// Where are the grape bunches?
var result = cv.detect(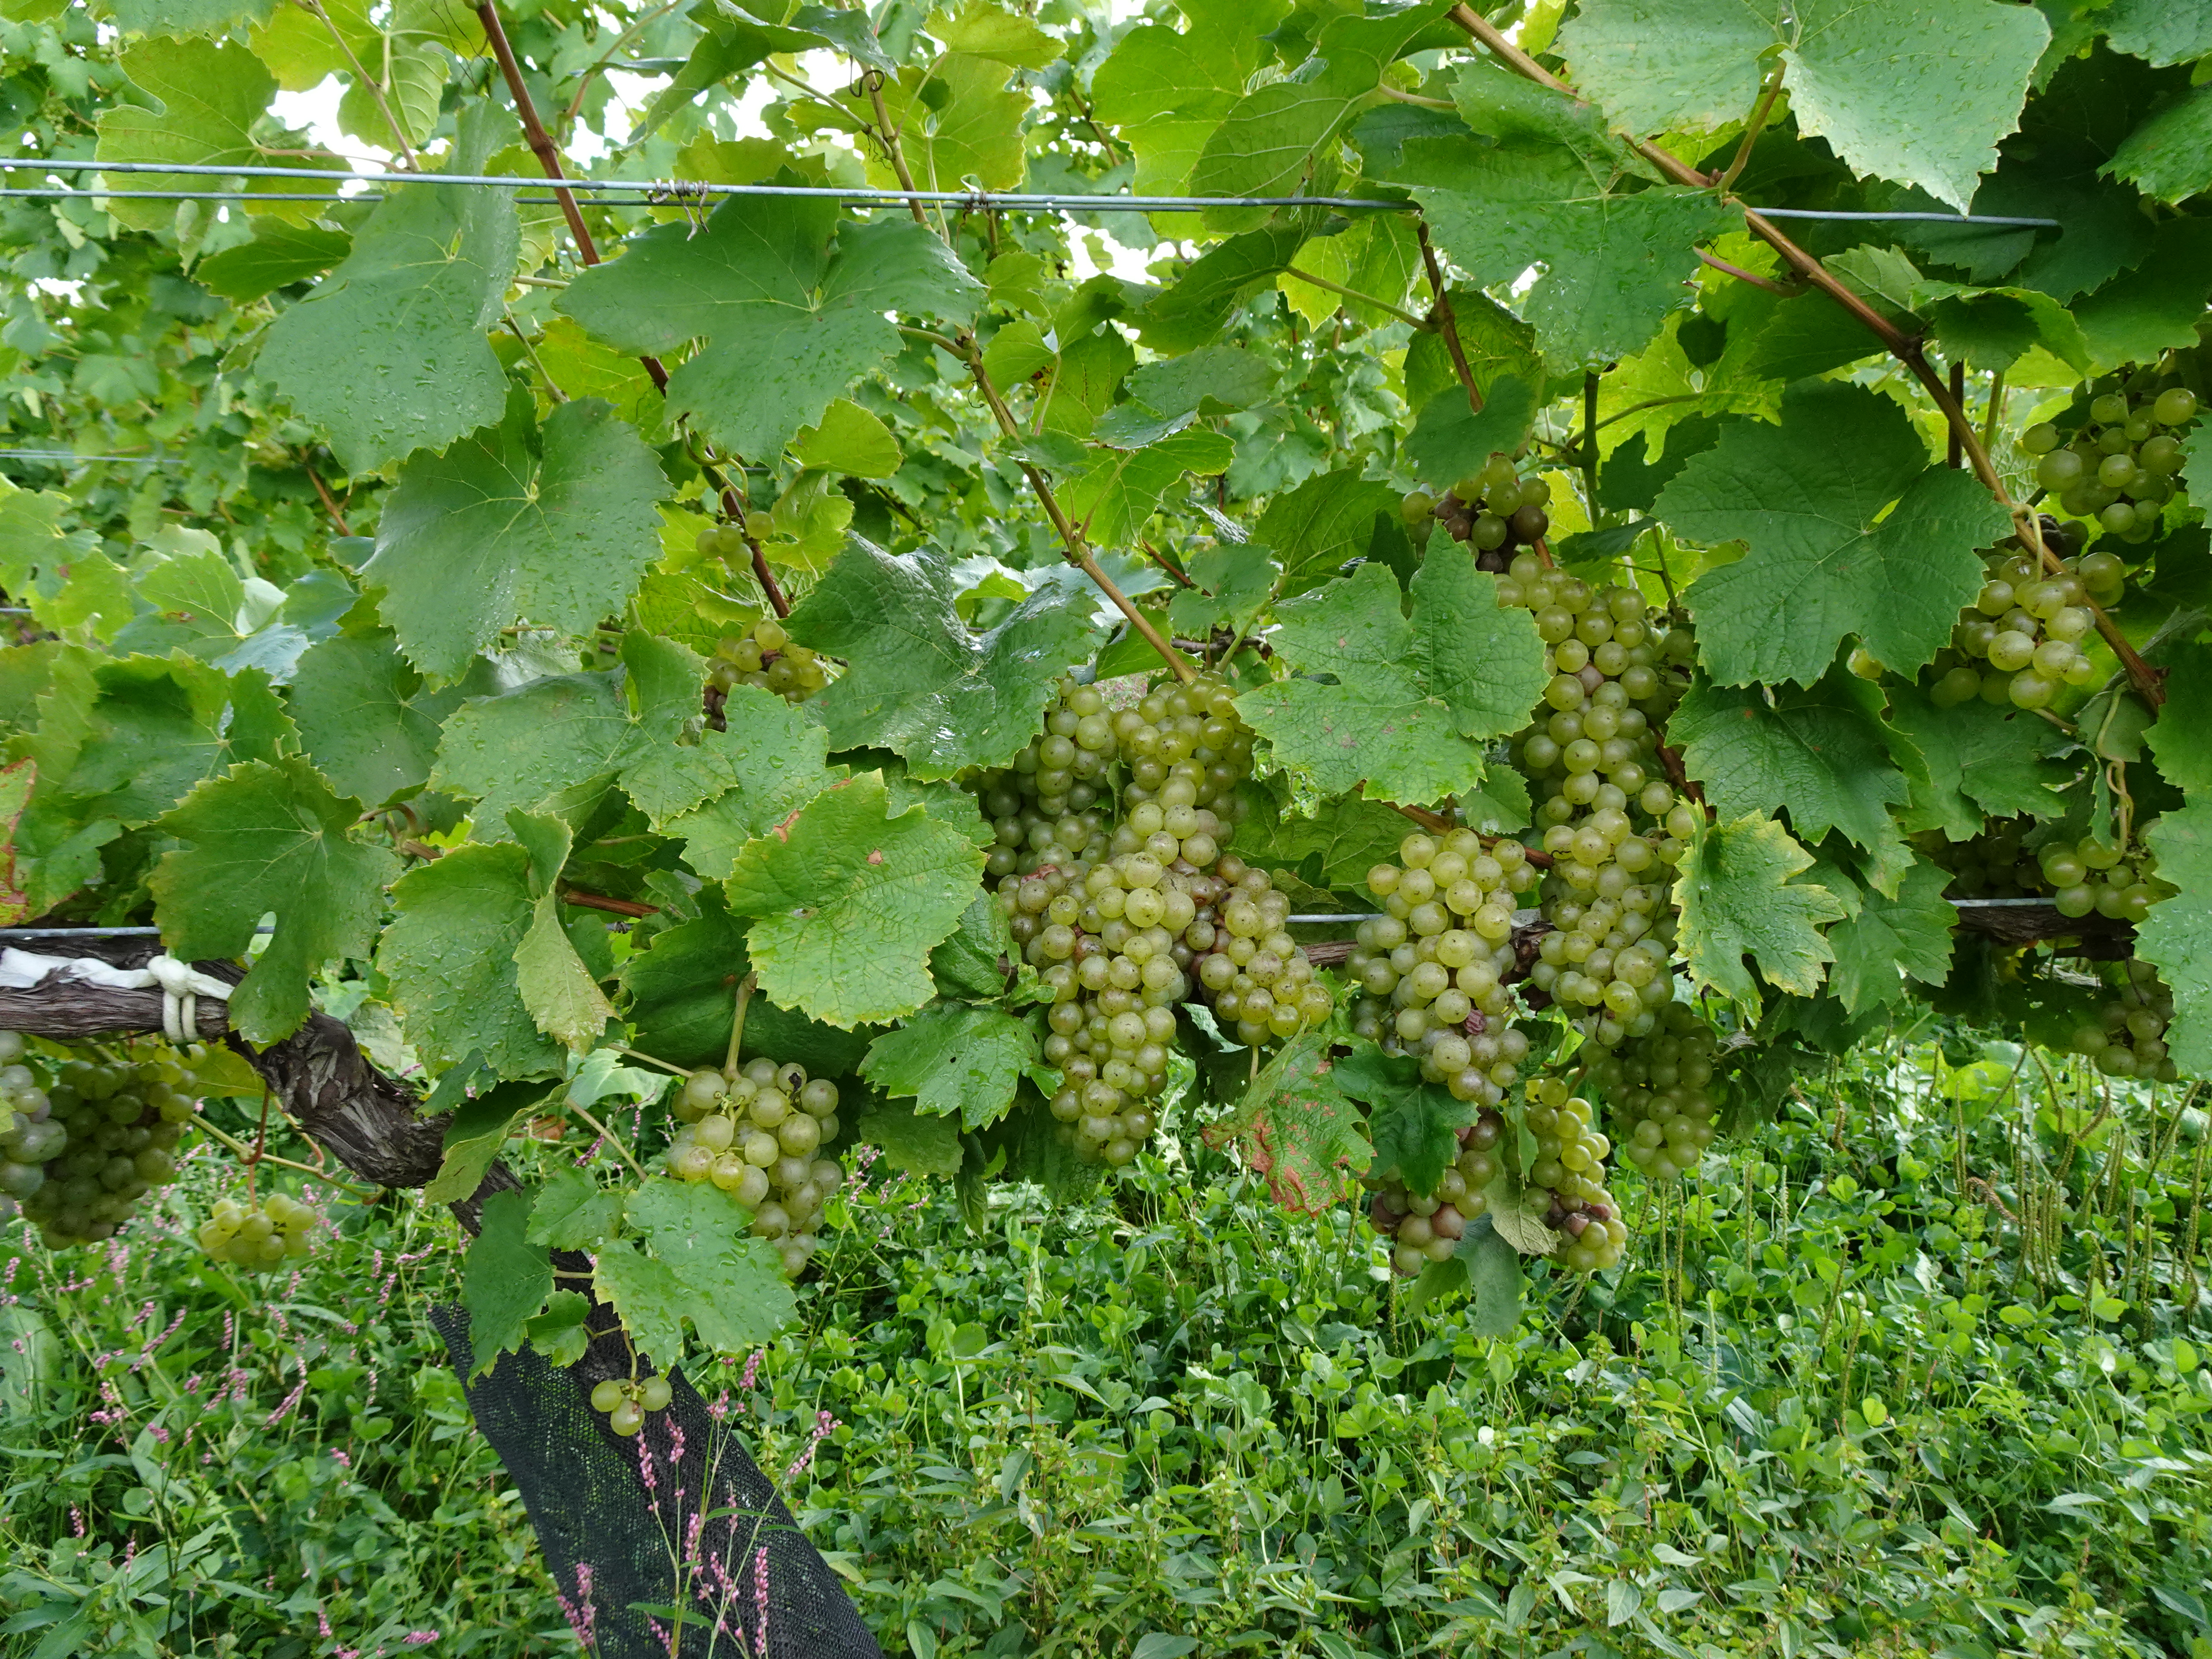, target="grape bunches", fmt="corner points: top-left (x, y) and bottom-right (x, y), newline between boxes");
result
(1528, 781), (1697, 1046)
(702, 618), (829, 732)
(664, 1058), (843, 1279)
(1113, 671), (1257, 875)
(1502, 1077), (1630, 1272)
(1599, 1001), (1728, 1190)
(1401, 450), (1552, 578)
(993, 850), (1197, 1165)
(1352, 1098), (1501, 1279)
(2071, 958), (2184, 1082)
(198, 1192), (317, 1274)
(0, 1030), (66, 1238)
(960, 672), (1121, 878)
(1911, 816), (2048, 899)
(1158, 853), (1335, 1046)
(1343, 827), (1538, 1110)
(1498, 555), (1697, 805)
(697, 511), (776, 570)
(2016, 383), (2209, 544)
(1847, 544), (2126, 709)
(591, 1376), (673, 1437)
(21, 1030), (207, 1250)
(2043, 814), (2183, 921)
